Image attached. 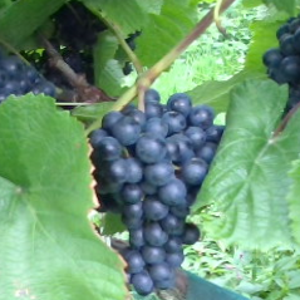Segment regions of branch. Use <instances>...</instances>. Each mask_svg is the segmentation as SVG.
<instances>
[{
	"instance_id": "1",
	"label": "branch",
	"mask_w": 300,
	"mask_h": 300,
	"mask_svg": "<svg viewBox=\"0 0 300 300\" xmlns=\"http://www.w3.org/2000/svg\"><path fill=\"white\" fill-rule=\"evenodd\" d=\"M83 4L96 15V17L102 24L108 25L113 30L117 40L119 41V44L125 51L126 55L134 62L135 67L138 71V79L135 81V84L132 85V88L125 91L122 97L118 99L116 103H114L112 107L109 108L108 111H106L102 116L98 117L94 121V123L90 125V127H87L85 129L86 135H89L95 129L100 128L102 119L105 115L109 114L111 110L121 111L134 98V96L138 93V90H145L147 87H149L153 82V79L158 76L163 70L167 69L173 62V60L179 56L180 53H182L186 48L190 47L199 38V36L208 29L214 19L213 8H210L208 13L196 23L195 28L193 29L191 34L179 40L174 48L167 51L165 55L161 56L160 59L157 60L152 67L148 68L142 74L143 67L141 63H139L137 54L130 49L129 45L122 37V32L119 31L117 26L112 21H110V18L107 16V14L101 11L91 0H84Z\"/></svg>"
}]
</instances>
